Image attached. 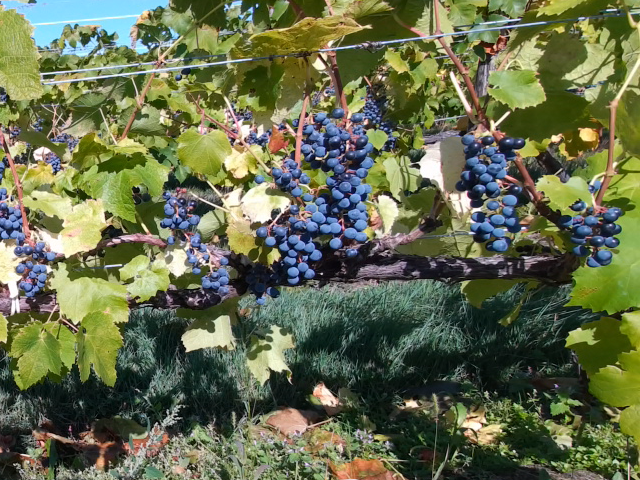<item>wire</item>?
<instances>
[{
  "mask_svg": "<svg viewBox=\"0 0 640 480\" xmlns=\"http://www.w3.org/2000/svg\"><path fill=\"white\" fill-rule=\"evenodd\" d=\"M599 13L600 14L584 15L580 17H571V18H556L551 20H543V21H535V22H527V23H515V22H524L526 20L525 16L513 17V18H502V19H491V20L477 21V22H470V23H460V24H454L453 29L454 30L462 29V28H472V29H463L459 31H446L438 34L406 36V37L394 38L390 40L368 41V42L357 43V44H348L346 46L340 45L338 47H325L320 49H313V50H309L305 52H297V53L268 54V55H262L258 57H252V58H239V59L220 60V61L204 62V63H196V64H188V65H177V66L166 67V68H145L139 71L113 72V73H105L103 75H95V76L74 78V79H52V80L44 81L43 85L48 86V85H54V84H77V83L91 82V81H97V80H105L107 78L141 76V75H146L148 73L162 74V73L175 72L180 70H191V69H198V68H207V67L241 64V63H254V62H260V61L270 60V59L299 58V57H307V56L322 54L327 52L348 51L350 49H359V48H365L370 46L392 45V44L403 43L408 41L440 39L448 36H461V35L474 34V33H480V32L505 31L510 29L553 25L558 23H573V22H582L586 20L622 17V13L620 12L619 8H602L599 10Z\"/></svg>",
  "mask_w": 640,
  "mask_h": 480,
  "instance_id": "obj_1",
  "label": "wire"
},
{
  "mask_svg": "<svg viewBox=\"0 0 640 480\" xmlns=\"http://www.w3.org/2000/svg\"><path fill=\"white\" fill-rule=\"evenodd\" d=\"M223 58H224V54L220 53V54H213V55H197V56L185 57V58H170V59H165L164 63L165 64L187 63V62H195L199 60H215V59H223Z\"/></svg>",
  "mask_w": 640,
  "mask_h": 480,
  "instance_id": "obj_4",
  "label": "wire"
},
{
  "mask_svg": "<svg viewBox=\"0 0 640 480\" xmlns=\"http://www.w3.org/2000/svg\"><path fill=\"white\" fill-rule=\"evenodd\" d=\"M156 64H157L156 60L140 61V62L122 63V64H118V65L93 67V68H88V69H75V70H64V71L40 72L39 76L40 77H53V76H66V75H77V74H90V73H95V72L120 70V69H124V68L153 66V65H156Z\"/></svg>",
  "mask_w": 640,
  "mask_h": 480,
  "instance_id": "obj_2",
  "label": "wire"
},
{
  "mask_svg": "<svg viewBox=\"0 0 640 480\" xmlns=\"http://www.w3.org/2000/svg\"><path fill=\"white\" fill-rule=\"evenodd\" d=\"M474 230H467L462 232H454V233H431L426 236L427 240H431L433 238H456V237H464L469 235H474Z\"/></svg>",
  "mask_w": 640,
  "mask_h": 480,
  "instance_id": "obj_5",
  "label": "wire"
},
{
  "mask_svg": "<svg viewBox=\"0 0 640 480\" xmlns=\"http://www.w3.org/2000/svg\"><path fill=\"white\" fill-rule=\"evenodd\" d=\"M138 14H124V15H115V16H104V17H96L89 19H72L66 21H46V22H34V27H48V26H68L74 24H91L98 22H106V21H118V20H126V19H138Z\"/></svg>",
  "mask_w": 640,
  "mask_h": 480,
  "instance_id": "obj_3",
  "label": "wire"
}]
</instances>
